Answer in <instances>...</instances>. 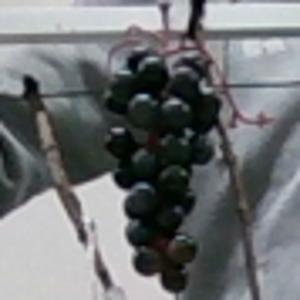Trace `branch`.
<instances>
[{"label":"branch","mask_w":300,"mask_h":300,"mask_svg":"<svg viewBox=\"0 0 300 300\" xmlns=\"http://www.w3.org/2000/svg\"><path fill=\"white\" fill-rule=\"evenodd\" d=\"M23 91L19 98L30 110L34 130L49 170L51 182L61 202L65 215L73 228L77 244L84 249L93 267V275L99 280L110 300H130L123 287L116 285L105 264L102 252L96 246L86 224L82 201L73 191L65 167L63 153L56 139L48 109L44 103L41 80L32 72L21 75Z\"/></svg>","instance_id":"1"},{"label":"branch","mask_w":300,"mask_h":300,"mask_svg":"<svg viewBox=\"0 0 300 300\" xmlns=\"http://www.w3.org/2000/svg\"><path fill=\"white\" fill-rule=\"evenodd\" d=\"M218 118L219 124L213 133L222 159L228 167V182L235 207V215L240 227L239 242L242 248V262L248 299L263 300L257 255L254 250L252 214L245 194L238 157L235 152V142L229 138L221 112Z\"/></svg>","instance_id":"2"},{"label":"branch","mask_w":300,"mask_h":300,"mask_svg":"<svg viewBox=\"0 0 300 300\" xmlns=\"http://www.w3.org/2000/svg\"><path fill=\"white\" fill-rule=\"evenodd\" d=\"M188 4V15L186 28L184 30L185 37L198 49V53L206 57L209 63V70L202 81L205 82V86H209L215 89L214 76H213V60L202 42V33L204 25L201 23L203 19L208 15L207 0H186Z\"/></svg>","instance_id":"3"}]
</instances>
